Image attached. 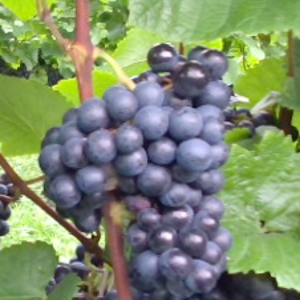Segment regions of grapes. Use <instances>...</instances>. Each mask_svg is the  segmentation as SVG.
Returning a JSON list of instances; mask_svg holds the SVG:
<instances>
[{"label": "grapes", "instance_id": "obj_1", "mask_svg": "<svg viewBox=\"0 0 300 300\" xmlns=\"http://www.w3.org/2000/svg\"><path fill=\"white\" fill-rule=\"evenodd\" d=\"M136 89L110 87L102 98L68 108L44 134L38 164L46 196L83 232L100 227L108 190L136 219L130 242L145 247L136 276L167 278L180 299L210 294L227 268L232 245L221 227L228 162L224 141L230 86L226 55L204 45L187 54L168 42L147 52Z\"/></svg>", "mask_w": 300, "mask_h": 300}]
</instances>
